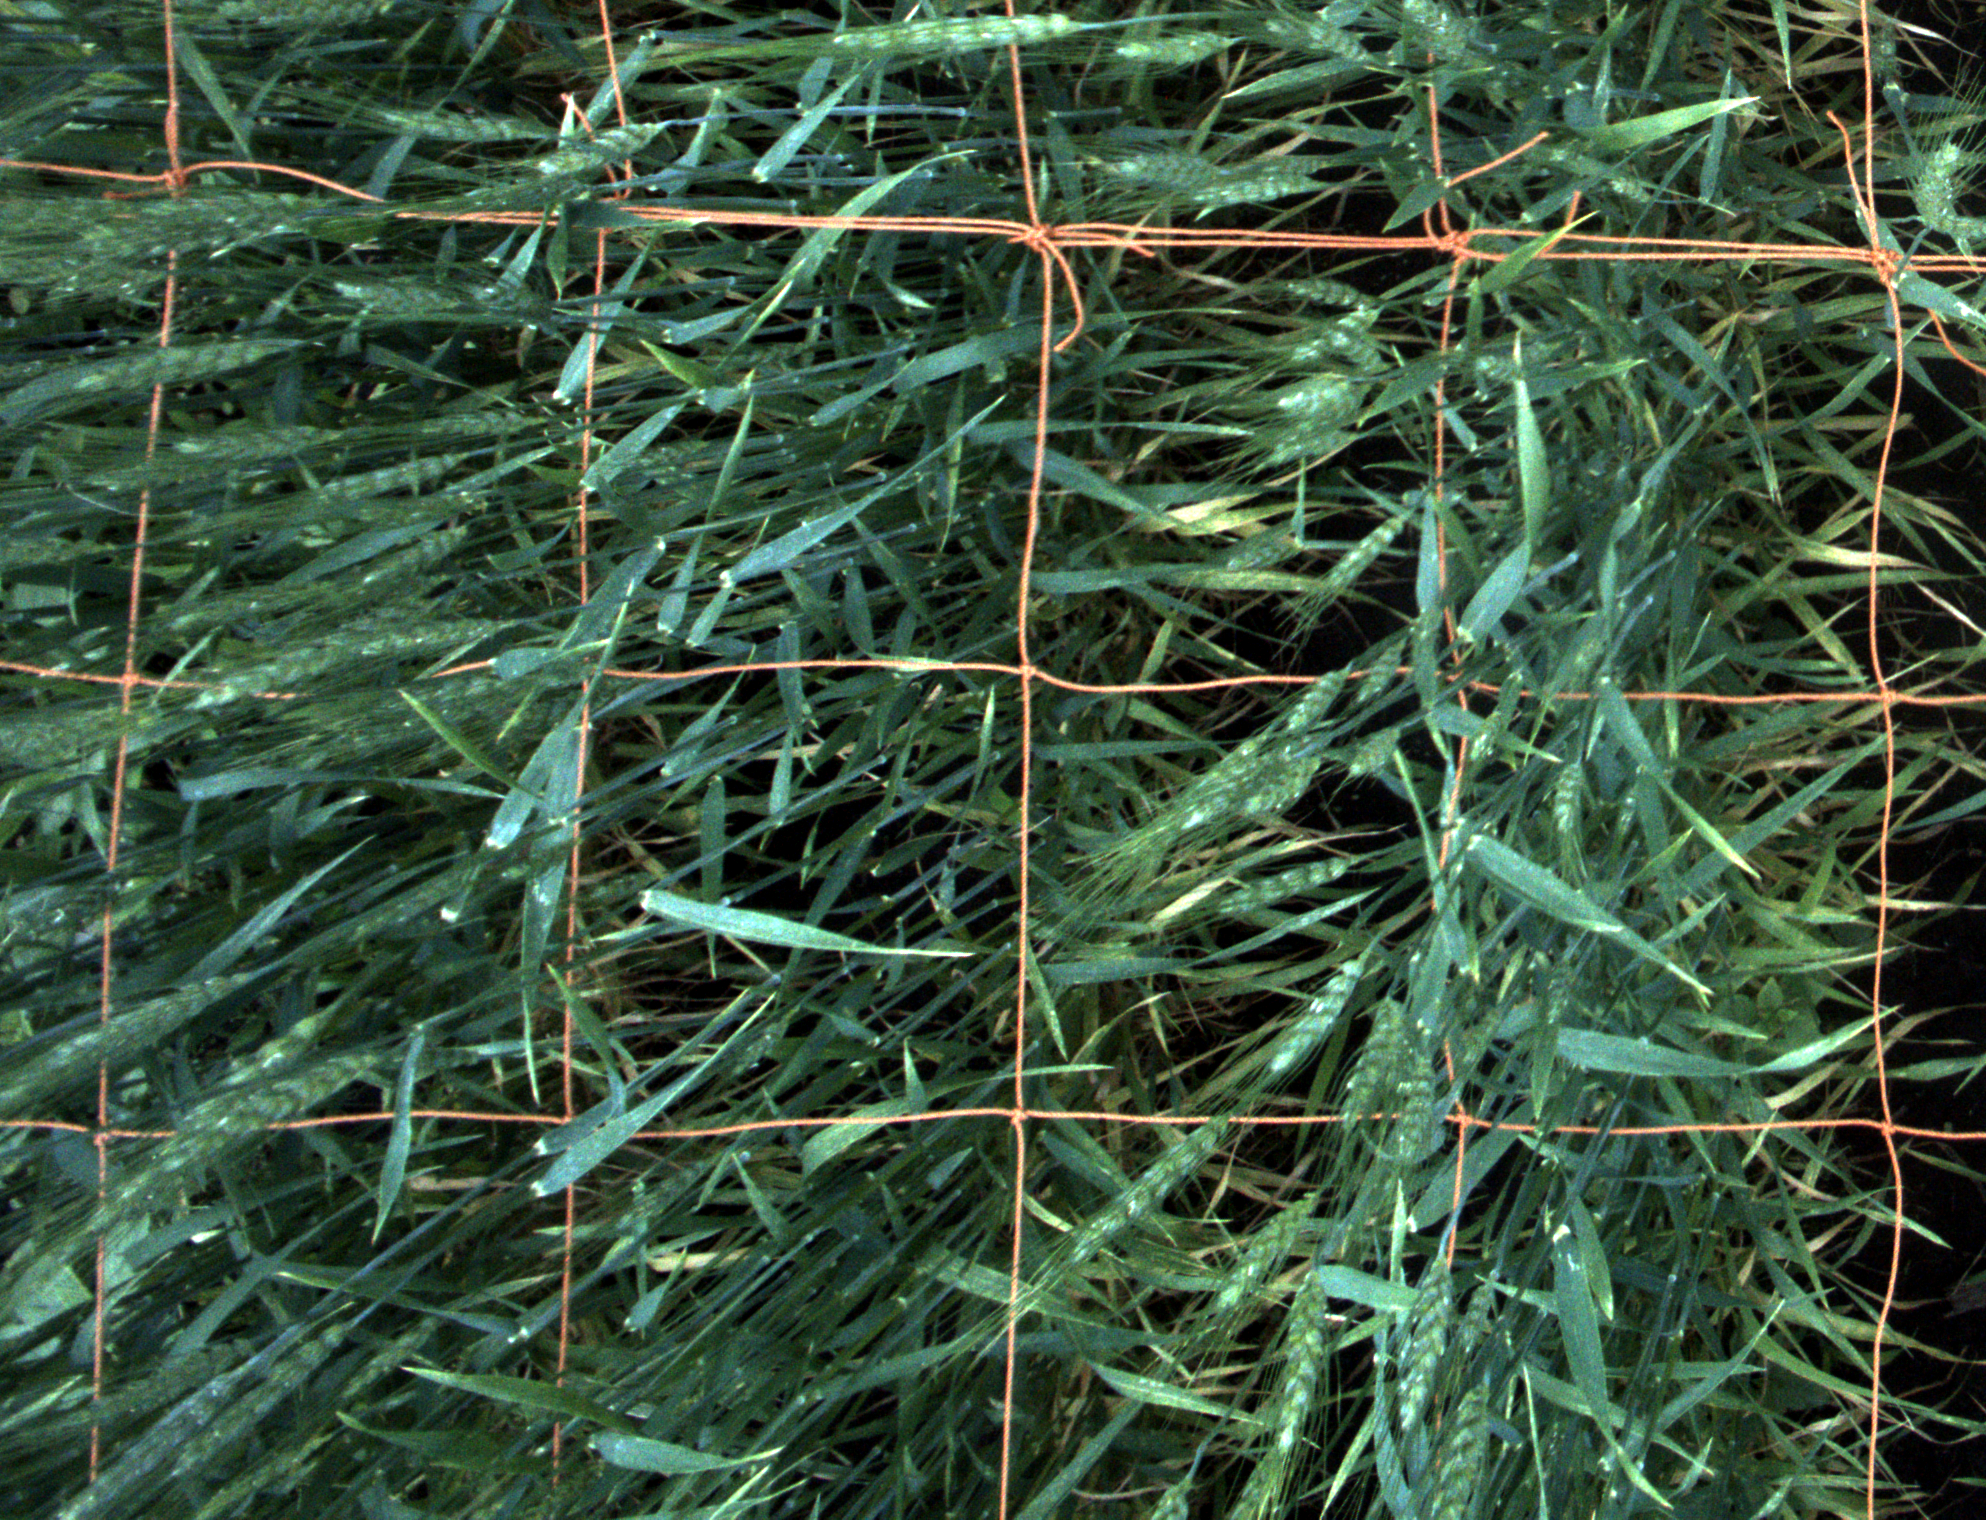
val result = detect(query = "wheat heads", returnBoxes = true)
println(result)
[1239,758,1312,827]
[1113,29,1238,68]
[1257,426,1355,472]
[1271,954,1358,1080]
[1345,720,1402,780]
[1453,1271,1499,1356]
[829,13,1084,58]
[1295,308,1379,362]
[1457,341,1524,385]
[1221,531,1304,571]
[1200,176,1325,205]
[1402,0,1465,50]
[1399,1261,1453,1434]
[0,704,139,770]
[1217,855,1355,921]
[1550,760,1585,839]
[1913,159,1957,212]
[0,250,185,290]
[609,1141,721,1240]
[381,110,543,142]
[1256,150,1331,171]
[1913,214,1986,239]
[300,450,472,533]
[474,282,535,319]
[132,188,340,230]
[526,107,658,185]
[83,441,251,486]
[336,276,472,312]
[69,1386,224,1520]
[56,1364,195,1433]
[0,974,242,1120]
[308,676,501,744]
[1181,733,1260,805]
[1356,638,1401,707]
[0,194,132,234]
[1344,996,1395,1133]
[411,410,548,441]
[219,0,395,37]
[360,523,470,601]
[71,854,141,934]
[332,1311,442,1408]
[1288,275,1377,306]
[334,862,486,956]
[1328,329,1388,375]
[1425,1383,1490,1516]
[360,490,468,518]
[212,1007,327,1099]
[172,1317,348,1475]
[1301,17,1376,63]
[176,417,350,457]
[1173,566,1300,595]
[364,619,517,655]
[724,1003,797,1085]
[0,540,126,572]
[618,436,705,464]
[155,1042,385,1181]
[1288,668,1342,733]
[1400,1055,1435,1166]
[1275,376,1362,424]
[1073,1115,1231,1259]
[195,594,421,704]
[1609,174,1652,203]
[176,1435,327,1520]
[705,342,825,370]
[308,706,472,768]
[1142,1481,1193,1520]
[1208,1187,1320,1316]
[1272,1271,1330,1460]
[63,337,317,394]
[1099,149,1229,192]
[1321,506,1412,594]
